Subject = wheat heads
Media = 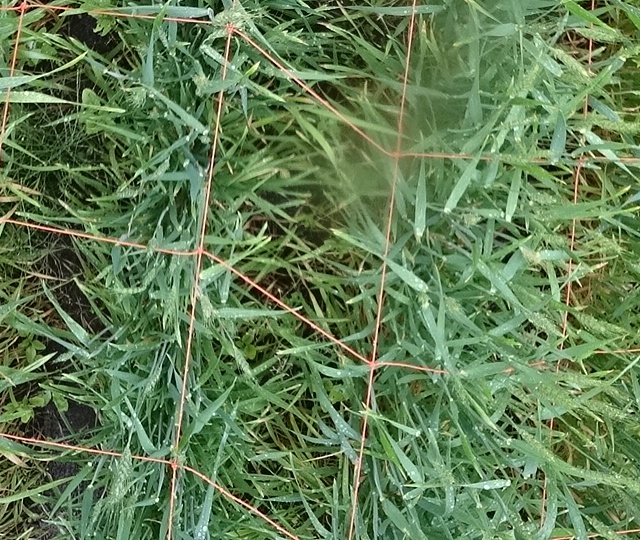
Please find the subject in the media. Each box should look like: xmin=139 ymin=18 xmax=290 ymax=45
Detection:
xmin=529 ymin=191 xmax=555 ymax=204
xmin=113 ymin=447 xmax=131 ymax=496
xmin=517 ymin=430 xmax=555 ymax=465
xmin=557 ymin=370 xmax=600 ymax=389
xmin=578 ymin=395 xmax=622 ymax=419
xmin=113 ymin=286 xmax=145 ymax=295
xmin=594 ymin=113 xmax=630 ymax=134
xmin=573 ymin=24 xmax=616 ymax=44
xmin=579 ymin=310 xmax=616 ymax=336
xmin=198 ymin=295 xmax=211 ymax=319
xmin=550 ymin=46 xmax=587 ymax=78
xmin=530 ymin=313 xmax=561 ymax=337
xmin=131 ymin=86 xmax=146 ymax=104
xmin=116 ymin=187 xmax=142 ymax=201
xmin=172 ymin=450 xmax=190 ymax=468
xmin=580 ymin=469 xmax=623 ymax=486
xmin=207 ymin=21 xmax=248 ymax=39
xmin=233 ymin=350 xmax=252 ymax=373
xmin=162 ymin=287 xmax=176 ymax=322
xmin=145 ymin=366 xmax=161 ymax=392
xmin=505 ymin=383 xmax=527 ymax=405
xmin=490 ymin=149 xmax=524 ymax=169
xmin=514 ymin=68 xmax=538 ymax=96
xmin=211 ymin=9 xmax=241 ymax=23
xmin=144 ymin=269 xmax=155 ymax=281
